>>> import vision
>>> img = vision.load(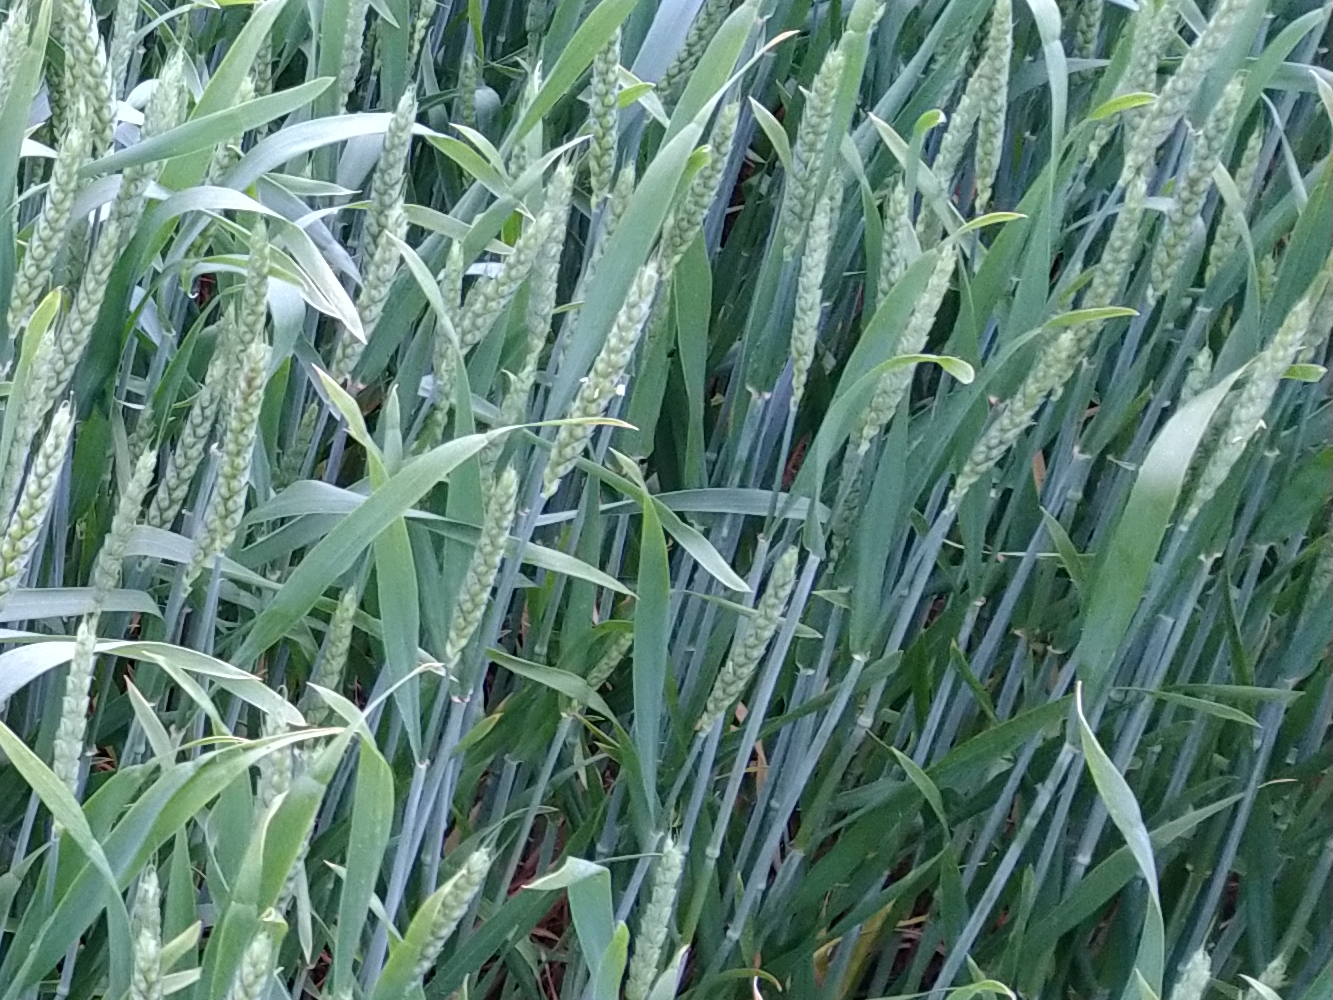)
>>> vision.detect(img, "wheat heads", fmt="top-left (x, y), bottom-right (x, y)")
top-left (432, 244), bottom-right (463, 397)
top-left (1120, 0), bottom-right (1157, 147)
top-left (360, 95), bottom-right (418, 288)
top-left (90, 451), bottom-right (158, 598)
top-left (1177, 309), bottom-right (1314, 518)
top-left (919, 62), bottom-right (979, 236)
top-left (459, 55), bottom-right (477, 127)
top-left (660, 106), bottom-right (741, 271)
top-left (1179, 348), bottom-right (1213, 409)
top-left (508, 70), bottom-right (539, 177)
top-left (590, 27), bottom-right (622, 205)
top-left (310, 589), bottom-right (358, 726)
top-left (252, 0), bottom-right (274, 96)
top-left (561, 169), bottom-right (639, 347)
top-left (829, 447), bottom-right (864, 555)
top-left (275, 404), bottom-right (319, 488)
top-left (48, 58), bottom-right (67, 144)
top-left (544, 272), bottom-right (661, 489)
top-left (525, 166), bottom-right (576, 359)
top-left (1200, 958), bottom-right (1287, 1000)
top-left (1302, 532), bottom-right (1333, 618)
top-left (524, 0), bottom-right (563, 51)
top-left (0, 412), bottom-right (74, 634)
top-left (110, 0), bottom-right (141, 93)
top-left (57, 0), bottom-right (117, 152)
top-left (623, 836), bottom-right (685, 1000)
top-left (275, 817), bottom-right (317, 905)
top-left (1078, 178), bottom-right (1147, 342)
top-left (1294, 254), bottom-right (1333, 368)
top-left (446, 470), bottom-right (520, 659)
top-left (972, 0), bottom-right (1014, 208)
top-left (128, 403), bottom-right (157, 463)
top-left (201, 87), bottom-right (252, 223)
top-left (1148, 85), bottom-right (1245, 293)
top-left (236, 218), bottom-right (272, 356)
top-left (656, 0), bottom-right (743, 94)
top-left (480, 365), bottom-right (537, 504)
top-left (410, 399), bottom-right (450, 454)
top-left (694, 552), bottom-right (802, 731)
top-left (143, 360), bottom-right (228, 528)
top-left (130, 931), bottom-right (169, 1000)
top-left (452, 218), bottom-right (553, 354)
top-left (111, 59), bottom-right (188, 243)
top-left (131, 870), bottom-right (161, 942)
top-left (318, 212), bottom-right (408, 382)
top-left (578, 632), bottom-right (634, 702)
top-left (259, 709), bottom-right (293, 810)
top-left (158, 909), bottom-right (275, 1000)
top-left (1093, 0), bottom-right (1213, 157)
top-left (0, 337), bottom-right (57, 530)
top-left (0, 11), bottom-right (30, 221)
top-left (878, 185), bottom-right (911, 308)
top-left (415, 0), bottom-right (464, 44)
top-left (791, 173), bottom-right (841, 394)
top-left (36, 222), bottom-right (123, 415)
top-left (954, 333), bottom-right (1081, 503)
top-left (782, 50), bottom-right (845, 254)
top-left (1205, 133), bottom-right (1263, 280)
top-left (193, 348), bottom-right (271, 575)
top-left (407, 851), bottom-right (492, 995)
top-left (143, 53), bottom-right (188, 139)
top-left (337, 0), bottom-right (363, 100)
top-left (54, 623), bottom-right (98, 796)
top-left (7, 133), bottom-right (85, 331)
top-left (1126, 0), bottom-right (1265, 172)
top-left (1068, 0), bottom-right (1104, 124)
top-left (863, 248), bottom-right (959, 445)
